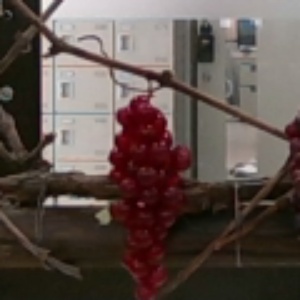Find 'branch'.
<instances>
[{
	"label": "branch",
	"mask_w": 300,
	"mask_h": 300,
	"mask_svg": "<svg viewBox=\"0 0 300 300\" xmlns=\"http://www.w3.org/2000/svg\"><path fill=\"white\" fill-rule=\"evenodd\" d=\"M292 164L293 158L291 156H288L281 169L275 174V176L271 179L267 186L250 200L245 209L235 218L233 223L228 226L216 240H213L211 244L207 246L204 252L199 254L197 258L193 262H191L170 285L159 288V296L156 300H161L162 298L173 292L178 286L183 284L185 280L190 277L198 269V267L208 259L213 251L245 237L248 233H250L257 227L260 221L273 215L277 210L288 204L296 196V192L294 190H291L285 197L280 199L277 203L273 204L269 209L259 213L246 227L229 236L251 213L255 205L261 200H265L273 192L279 181L287 175Z\"/></svg>",
	"instance_id": "2"
},
{
	"label": "branch",
	"mask_w": 300,
	"mask_h": 300,
	"mask_svg": "<svg viewBox=\"0 0 300 300\" xmlns=\"http://www.w3.org/2000/svg\"><path fill=\"white\" fill-rule=\"evenodd\" d=\"M62 2V0H53L46 10L39 16H37L29 7L21 0H11L12 6L30 22V26L12 43L11 47L5 52L0 61V77L6 72L7 68L18 55L21 48L25 46L28 41L37 33L42 32L46 38L51 42L50 53L57 55L58 53H71L73 55L85 58L90 61L97 62L98 64L105 65L111 68H115L124 72L132 73L141 77H152L159 83L161 88H172L183 95L196 98L200 102L209 105L225 114L233 116L265 133L271 134L273 137H277L284 141L290 142L288 135L278 129L230 108L216 99L201 93L198 90L190 87L187 83L173 78V72L171 70H163L161 73L155 71L138 68L130 64H125L122 61H117L108 57H104L98 54H93L83 49H79L72 45H68L62 38L56 36V34L48 28L45 24L48 17H50L56 7Z\"/></svg>",
	"instance_id": "1"
}]
</instances>
